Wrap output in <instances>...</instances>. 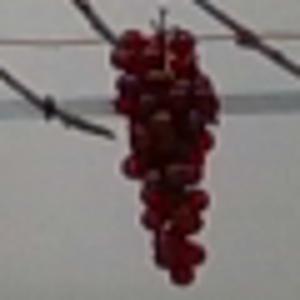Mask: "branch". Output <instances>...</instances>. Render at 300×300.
<instances>
[{
    "instance_id": "1",
    "label": "branch",
    "mask_w": 300,
    "mask_h": 300,
    "mask_svg": "<svg viewBox=\"0 0 300 300\" xmlns=\"http://www.w3.org/2000/svg\"><path fill=\"white\" fill-rule=\"evenodd\" d=\"M0 82H3L17 96L28 101L42 115L43 123H51L57 120L63 126L64 131L76 130L111 142L118 140V136L113 129L106 127L104 124L83 118L81 113H73L66 108L58 106L53 92H47L45 95L40 96V94L18 80L2 64H0Z\"/></svg>"
},
{
    "instance_id": "2",
    "label": "branch",
    "mask_w": 300,
    "mask_h": 300,
    "mask_svg": "<svg viewBox=\"0 0 300 300\" xmlns=\"http://www.w3.org/2000/svg\"><path fill=\"white\" fill-rule=\"evenodd\" d=\"M213 22L232 32L233 44L236 49L244 52H255L259 56L286 72L300 82V64L292 59L284 50L269 44L256 32L231 16L226 10L211 0H188Z\"/></svg>"
},
{
    "instance_id": "3",
    "label": "branch",
    "mask_w": 300,
    "mask_h": 300,
    "mask_svg": "<svg viewBox=\"0 0 300 300\" xmlns=\"http://www.w3.org/2000/svg\"><path fill=\"white\" fill-rule=\"evenodd\" d=\"M87 24L89 31L94 32L110 48L116 46L119 35L111 28L106 19L99 14L91 0H67Z\"/></svg>"
}]
</instances>
